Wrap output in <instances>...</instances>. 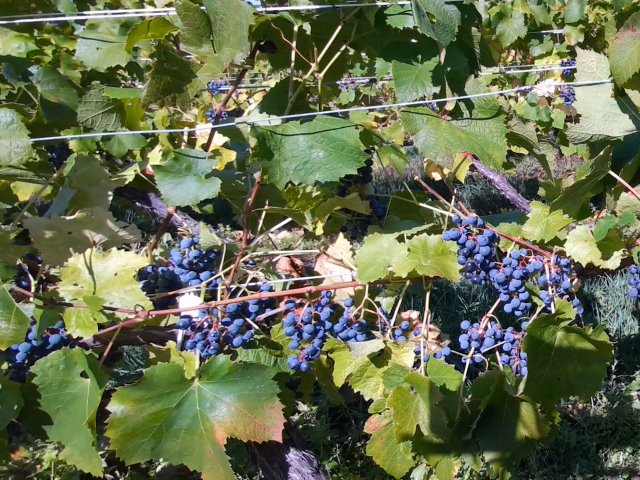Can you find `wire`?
I'll use <instances>...</instances> for the list:
<instances>
[{"mask_svg": "<svg viewBox=\"0 0 640 480\" xmlns=\"http://www.w3.org/2000/svg\"><path fill=\"white\" fill-rule=\"evenodd\" d=\"M174 7L166 8H112L105 10L42 11L0 15V24L15 25L25 22L59 23L66 21H88L103 18L123 19L130 17H175Z\"/></svg>", "mask_w": 640, "mask_h": 480, "instance_id": "2", "label": "wire"}, {"mask_svg": "<svg viewBox=\"0 0 640 480\" xmlns=\"http://www.w3.org/2000/svg\"><path fill=\"white\" fill-rule=\"evenodd\" d=\"M612 78H604L600 80H585V81H568V82H547L540 83L535 85H522L514 88H504L498 90H492L487 92H472L466 95H455L450 98H431V99H421L414 100L410 102H396V103H388L384 105H362V106H352L349 108H336L329 110H321V111H309V112H301L295 114H282V115H273L266 117H259L250 120H240V121H232L228 123H218L212 126H200V127H190V128H155L149 130H140V131H130V130H118L114 132H97L91 134H67L61 136H49V137H32V142H51V141H63L69 139H93L99 137H116L120 135L127 136H142V135H151L158 133H192V132H202V131H214L221 128H230L234 126H242V125H253L261 122L275 121V120H284V119H297L303 117H311V116H323V115H331L338 113H351V112H359L365 110H387L391 108L398 107H412L417 105L424 104H433V103H451L457 100H468L475 97H489L506 93H516L524 90H537L542 88L549 87H571V86H587V85H603L606 83H612Z\"/></svg>", "mask_w": 640, "mask_h": 480, "instance_id": "1", "label": "wire"}, {"mask_svg": "<svg viewBox=\"0 0 640 480\" xmlns=\"http://www.w3.org/2000/svg\"><path fill=\"white\" fill-rule=\"evenodd\" d=\"M391 1L386 2H345V3H334L332 5L325 4H306V5H298V6H266V7H256L257 12H268V11H300V10H309V9H323V10H331L336 8H347V7H386L391 6Z\"/></svg>", "mask_w": 640, "mask_h": 480, "instance_id": "3", "label": "wire"}, {"mask_svg": "<svg viewBox=\"0 0 640 480\" xmlns=\"http://www.w3.org/2000/svg\"><path fill=\"white\" fill-rule=\"evenodd\" d=\"M352 276H353L352 272L328 273V274L305 275V276H301V277H295V278H292V279L268 280V283H285V282H296V281H301V280L345 278V277H352Z\"/></svg>", "mask_w": 640, "mask_h": 480, "instance_id": "4", "label": "wire"}]
</instances>
